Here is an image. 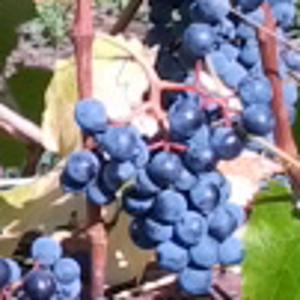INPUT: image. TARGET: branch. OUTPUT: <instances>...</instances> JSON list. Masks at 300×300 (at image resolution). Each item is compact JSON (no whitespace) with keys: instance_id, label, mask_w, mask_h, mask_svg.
<instances>
[{"instance_id":"obj_2","label":"branch","mask_w":300,"mask_h":300,"mask_svg":"<svg viewBox=\"0 0 300 300\" xmlns=\"http://www.w3.org/2000/svg\"><path fill=\"white\" fill-rule=\"evenodd\" d=\"M77 14L69 25V37L75 46L77 92L88 97L93 92L94 32L92 0H76Z\"/></svg>"},{"instance_id":"obj_3","label":"branch","mask_w":300,"mask_h":300,"mask_svg":"<svg viewBox=\"0 0 300 300\" xmlns=\"http://www.w3.org/2000/svg\"><path fill=\"white\" fill-rule=\"evenodd\" d=\"M86 231L91 243L92 255V300H105L104 297V268L107 264V230L104 224L103 208L86 202Z\"/></svg>"},{"instance_id":"obj_4","label":"branch","mask_w":300,"mask_h":300,"mask_svg":"<svg viewBox=\"0 0 300 300\" xmlns=\"http://www.w3.org/2000/svg\"><path fill=\"white\" fill-rule=\"evenodd\" d=\"M80 135L83 138L82 144L85 149L94 151L99 157H103L105 155V152L96 143V139L93 135L89 134L86 130H82Z\"/></svg>"},{"instance_id":"obj_1","label":"branch","mask_w":300,"mask_h":300,"mask_svg":"<svg viewBox=\"0 0 300 300\" xmlns=\"http://www.w3.org/2000/svg\"><path fill=\"white\" fill-rule=\"evenodd\" d=\"M262 6L264 7V20L260 31V55L262 56L263 69L268 73L270 82L275 86L272 104L277 114L278 124L273 138V146L277 148L288 176L294 179L296 186L300 188V151L290 125V117L281 99L283 86L277 29L274 24L275 16L271 14L269 0H262Z\"/></svg>"}]
</instances>
